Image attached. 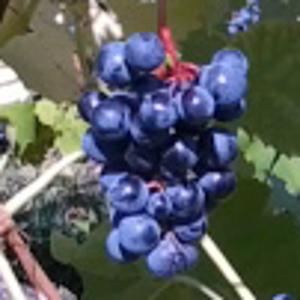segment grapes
<instances>
[{
  "mask_svg": "<svg viewBox=\"0 0 300 300\" xmlns=\"http://www.w3.org/2000/svg\"><path fill=\"white\" fill-rule=\"evenodd\" d=\"M95 69L108 91L78 99L85 158L101 167L99 186L113 228L103 241L116 265L142 258L153 277H169L200 259L192 243L211 231L210 204L233 197L229 166L238 140L216 121L244 118L252 66L237 45L217 47L208 65L166 52L159 30L108 38Z\"/></svg>",
  "mask_w": 300,
  "mask_h": 300,
  "instance_id": "obj_1",
  "label": "grapes"
}]
</instances>
